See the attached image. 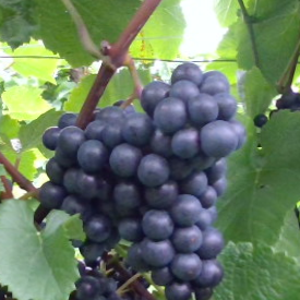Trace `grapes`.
Here are the masks:
<instances>
[{"mask_svg": "<svg viewBox=\"0 0 300 300\" xmlns=\"http://www.w3.org/2000/svg\"><path fill=\"white\" fill-rule=\"evenodd\" d=\"M170 83L95 108L84 127L79 114H62L43 134L56 153L39 197L44 208L80 214L86 233L72 245L86 257L126 238L128 266L151 270L165 300H209L224 276L214 205L228 189L226 157L245 146L247 130L233 119L238 102L221 72L184 62Z\"/></svg>", "mask_w": 300, "mask_h": 300, "instance_id": "1", "label": "grapes"}]
</instances>
